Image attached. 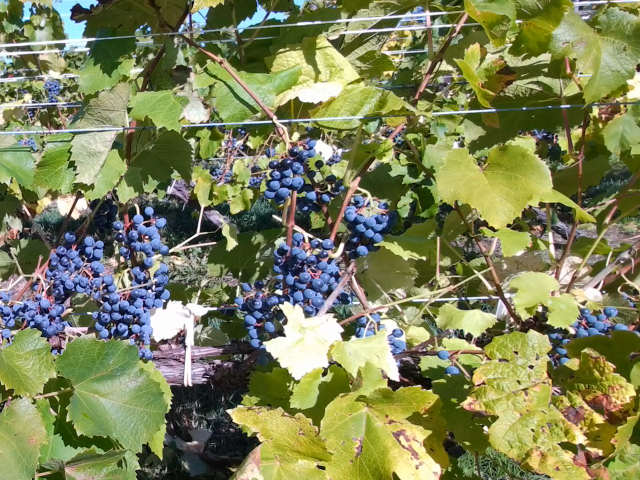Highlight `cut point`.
<instances>
[{
  "label": "cut point",
  "mask_w": 640,
  "mask_h": 480,
  "mask_svg": "<svg viewBox=\"0 0 640 480\" xmlns=\"http://www.w3.org/2000/svg\"><path fill=\"white\" fill-rule=\"evenodd\" d=\"M273 122H274L275 125L280 127L283 130V132L285 133V135H284L285 143L286 144H290L291 143V133H290L289 129L284 124H279L278 123V116L277 115L273 116Z\"/></svg>",
  "instance_id": "obj_1"
},
{
  "label": "cut point",
  "mask_w": 640,
  "mask_h": 480,
  "mask_svg": "<svg viewBox=\"0 0 640 480\" xmlns=\"http://www.w3.org/2000/svg\"><path fill=\"white\" fill-rule=\"evenodd\" d=\"M355 190L364 193L369 199L373 198V194L367 188L356 186Z\"/></svg>",
  "instance_id": "obj_2"
}]
</instances>
